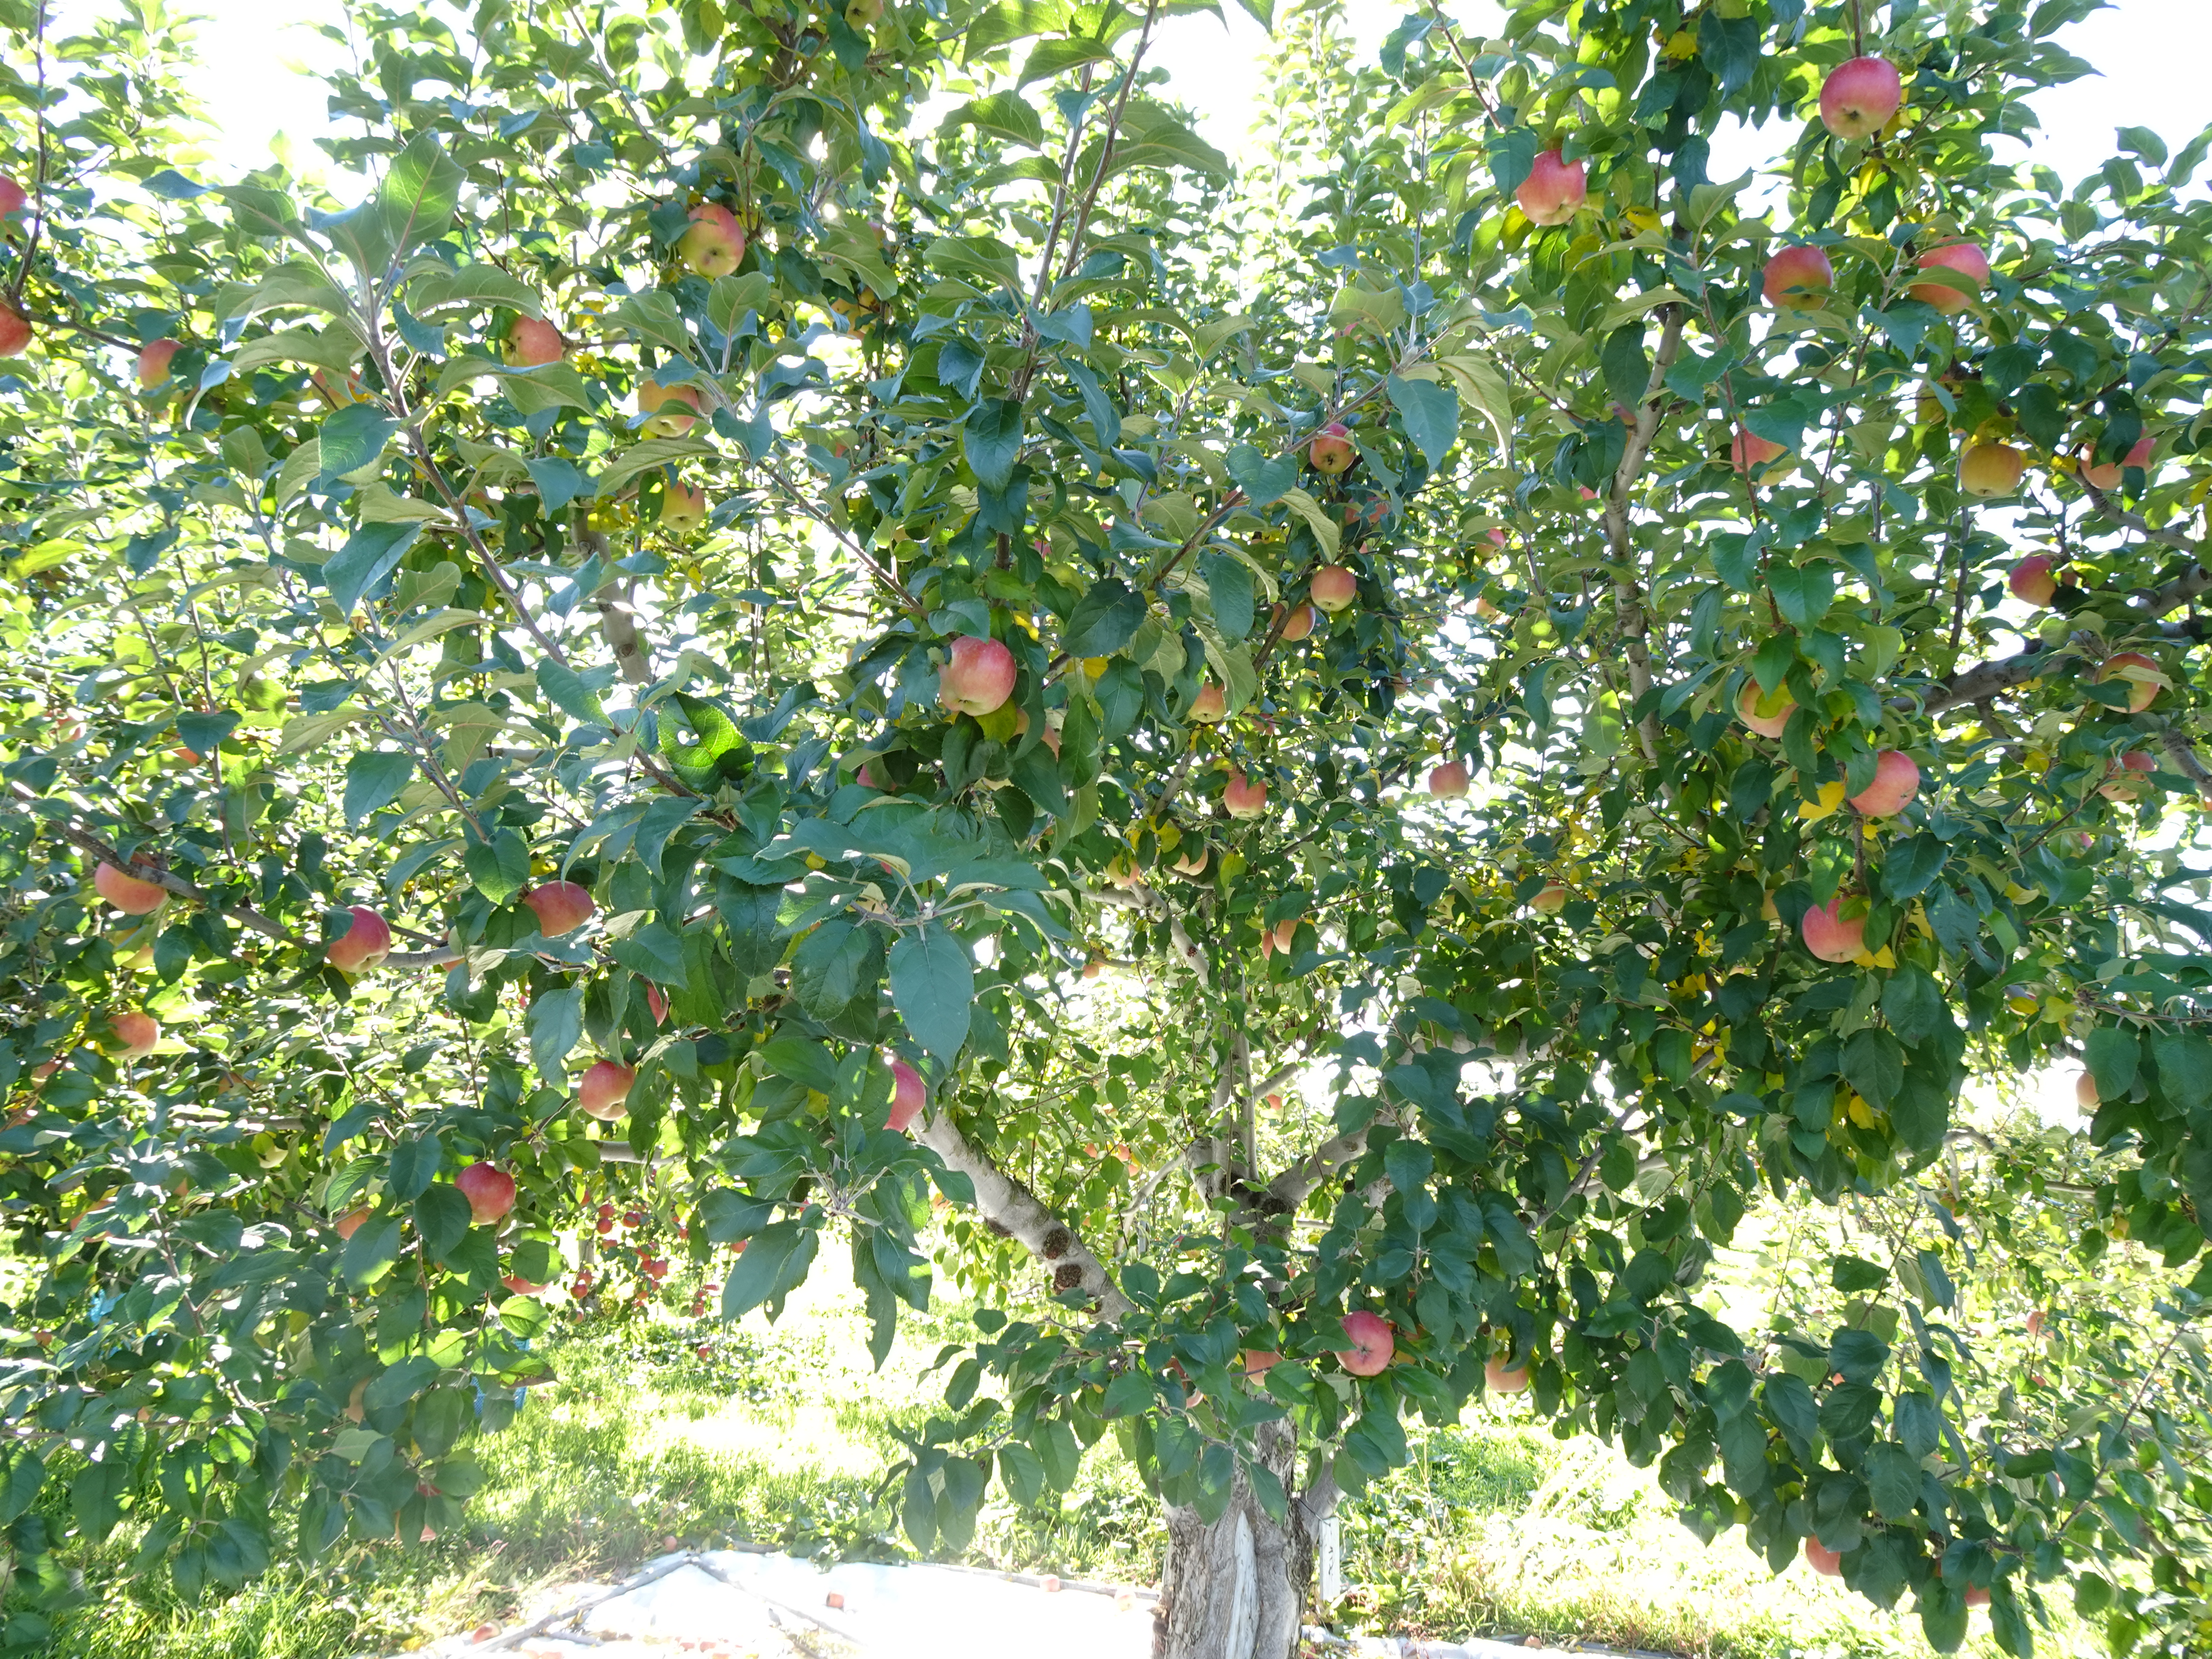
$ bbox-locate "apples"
[2011,552,2076,609]
[40,705,88,747]
[677,201,744,280]
[1786,757,1852,822]
[2049,1471,2068,1486]
[561,1266,595,1301]
[612,974,670,1042]
[630,1237,657,1262]
[1081,938,1114,961]
[1521,1634,1545,1651]
[1082,1140,1100,1166]
[1756,886,1795,932]
[851,746,904,800]
[2028,1375,2045,1393]
[25,1324,54,1349]
[598,1237,618,1256]
[657,479,706,535]
[1307,565,1356,613]
[0,293,35,360]
[1938,1187,1973,1222]
[808,914,825,936]
[1333,317,1383,353]
[1186,673,1231,725]
[1217,485,1256,516]
[638,373,701,438]
[319,904,394,975]
[1272,596,1315,640]
[689,1281,710,1300]
[1274,1256,1302,1282]
[1409,669,1434,696]
[1613,391,1647,429]
[1819,56,1903,140]
[310,356,367,419]
[1733,417,1801,488]
[342,1370,394,1428]
[640,1256,670,1276]
[1095,521,1123,546]
[162,733,200,770]
[1084,1346,1105,1360]
[1762,244,1834,315]
[1829,1367,1858,1393]
[1171,1231,1192,1253]
[633,1277,655,1298]
[442,923,495,982]
[30,1050,76,1103]
[70,1192,120,1244]
[1478,1318,1498,1342]
[825,424,872,471]
[677,1225,692,1241]
[563,1303,588,1325]
[1470,523,1505,559]
[729,1234,749,1255]
[1402,1281,1426,1302]
[739,590,773,620]
[1736,796,1773,834]
[1340,532,1371,559]
[511,487,542,516]
[1102,850,1141,886]
[98,1011,157,1061]
[1187,1245,1204,1263]
[1272,915,1323,954]
[2079,418,2164,491]
[501,312,565,377]
[2203,790,2212,813]
[1227,774,1266,821]
[1100,1097,1127,1123]
[1082,963,1102,980]
[872,862,905,892]
[1262,929,1296,966]
[2012,660,2048,691]
[1652,19,1679,46]
[1922,1451,1947,1475]
[2097,652,2161,715]
[452,1163,514,1227]
[138,1403,175,1440]
[0,1099,36,1140]
[645,1159,670,1182]
[1935,1555,2005,1606]
[1262,1087,1286,1118]
[1428,761,1470,802]
[937,632,1021,717]
[500,1244,553,1296]
[890,523,930,565]
[2067,828,2098,862]
[2027,1310,2058,1342]
[817,269,863,336]
[524,880,598,962]
[41,562,74,593]
[517,986,542,1009]
[1404,641,1426,664]
[851,272,897,328]
[230,949,261,972]
[191,698,212,719]
[573,1185,598,1209]
[2075,1068,2121,1112]
[1121,1159,1145,1177]
[1245,1339,1289,1388]
[217,1065,276,1113]
[1807,1308,1828,1328]
[0,171,28,236]
[94,848,165,915]
[1078,1209,1099,1230]
[166,1165,212,1205]
[1803,893,1873,961]
[796,1193,817,1212]
[1515,144,1587,228]
[620,1208,642,1229]
[852,1055,928,1135]
[931,1191,951,1211]
[703,1273,721,1293]
[1581,871,1616,898]
[1805,1511,1868,1579]
[346,613,368,637]
[1903,233,1993,319]
[1385,671,1409,694]
[1531,876,1565,915]
[1917,368,1986,436]
[381,609,404,638]
[594,1199,617,1217]
[112,925,167,971]
[1485,1350,1531,1393]
[684,1303,708,1321]
[1015,534,1053,573]
[1957,444,2023,499]
[1570,472,1601,507]
[1375,1315,1422,1373]
[1311,424,1360,477]
[2008,988,2041,1016]
[393,1478,449,1542]
[1345,490,1394,537]
[136,333,203,404]
[578,1056,642,1122]
[1166,831,1210,876]
[336,1199,392,1255]
[696,1344,716,1362]
[1159,1355,1208,1411]
[2095,749,2159,802]
[998,711,1059,778]
[1476,590,1501,627]
[639,1275,661,1293]
[441,1006,461,1022]
[838,222,886,262]
[593,1217,615,1233]
[1329,1309,1396,1379]
[822,0,885,32]
[2103,1207,2136,1244]
[1732,665,1812,741]
[2107,1372,2134,1400]
[1239,708,1277,746]
[2128,1519,2156,1549]
[458,487,490,522]
[1295,1636,1320,1659]
[1843,746,1921,819]
[434,1249,464,1276]
[1110,1138,1131,1165]
[1439,889,1486,925]
[1858,898,1933,968]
